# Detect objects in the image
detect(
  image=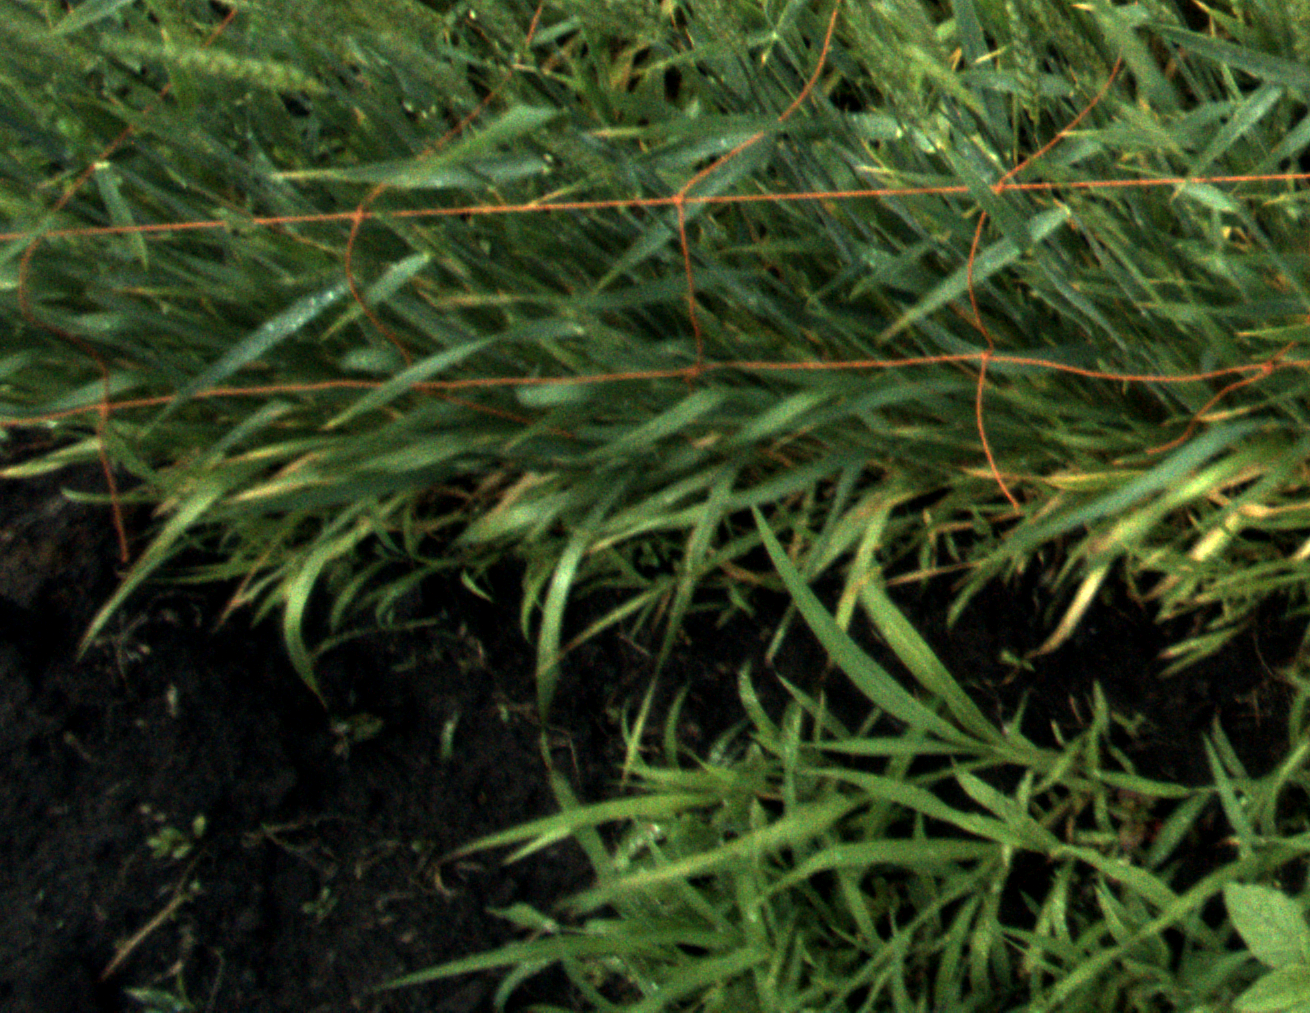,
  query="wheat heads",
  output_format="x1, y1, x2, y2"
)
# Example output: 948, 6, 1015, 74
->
997, 0, 1043, 127
683, 0, 752, 52
999, 0, 1110, 78
531, 0, 680, 39
266, 0, 347, 29
123, 0, 195, 39
336, 0, 453, 31
836, 0, 935, 131
1119, 0, 1183, 28
1260, 0, 1310, 50
496, 88, 637, 195
371, 29, 476, 93
496, 0, 640, 36
243, 0, 280, 46
0, 0, 102, 67
428, 0, 531, 56
108, 36, 335, 97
